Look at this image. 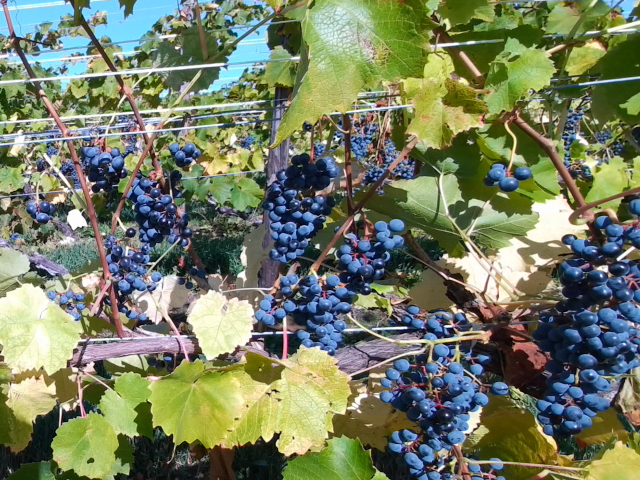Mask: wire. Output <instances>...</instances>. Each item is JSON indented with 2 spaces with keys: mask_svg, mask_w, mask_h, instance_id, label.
<instances>
[{
  "mask_svg": "<svg viewBox=\"0 0 640 480\" xmlns=\"http://www.w3.org/2000/svg\"><path fill=\"white\" fill-rule=\"evenodd\" d=\"M636 32H640V27L612 30V31H609L607 33V36L611 37V36L618 35V34L636 33Z\"/></svg>",
  "mask_w": 640,
  "mask_h": 480,
  "instance_id": "obj_8",
  "label": "wire"
},
{
  "mask_svg": "<svg viewBox=\"0 0 640 480\" xmlns=\"http://www.w3.org/2000/svg\"><path fill=\"white\" fill-rule=\"evenodd\" d=\"M505 38H494V39H481V40H462V41H453V42H441V43H432L430 45L431 49L435 48H443V47H456V46H464V45H483V44H496V43H505Z\"/></svg>",
  "mask_w": 640,
  "mask_h": 480,
  "instance_id": "obj_6",
  "label": "wire"
},
{
  "mask_svg": "<svg viewBox=\"0 0 640 480\" xmlns=\"http://www.w3.org/2000/svg\"><path fill=\"white\" fill-rule=\"evenodd\" d=\"M637 80H640V75L623 76L618 78H607V79H600V80H588V81L578 82V83L550 85L547 87V90L552 91V90L568 89V88H580V87H587L590 85H603V84L609 85L610 83H620L625 81H637Z\"/></svg>",
  "mask_w": 640,
  "mask_h": 480,
  "instance_id": "obj_4",
  "label": "wire"
},
{
  "mask_svg": "<svg viewBox=\"0 0 640 480\" xmlns=\"http://www.w3.org/2000/svg\"><path fill=\"white\" fill-rule=\"evenodd\" d=\"M197 334L185 335H124V336H105V337H89L78 338V343L91 342H107V341H126V340H188L197 339Z\"/></svg>",
  "mask_w": 640,
  "mask_h": 480,
  "instance_id": "obj_3",
  "label": "wire"
},
{
  "mask_svg": "<svg viewBox=\"0 0 640 480\" xmlns=\"http://www.w3.org/2000/svg\"><path fill=\"white\" fill-rule=\"evenodd\" d=\"M415 107H416L415 103H407V104L394 105V106H373V107H367V108L348 109L347 113L358 114V113H370L375 111H396V110H403V109H409V108H415Z\"/></svg>",
  "mask_w": 640,
  "mask_h": 480,
  "instance_id": "obj_7",
  "label": "wire"
},
{
  "mask_svg": "<svg viewBox=\"0 0 640 480\" xmlns=\"http://www.w3.org/2000/svg\"><path fill=\"white\" fill-rule=\"evenodd\" d=\"M303 56L296 57H281L272 61H217L210 63H196V64H174L168 66H152L145 68L127 69L123 71L113 72H101L94 74H82L66 77H51V78H37V79H23V80H0L1 86H13V85H25V84H39V83H53V82H68L84 79H96L104 77L126 76L129 74L147 73L154 71H170L176 69H224L232 66H274L283 62H299L303 61Z\"/></svg>",
  "mask_w": 640,
  "mask_h": 480,
  "instance_id": "obj_1",
  "label": "wire"
},
{
  "mask_svg": "<svg viewBox=\"0 0 640 480\" xmlns=\"http://www.w3.org/2000/svg\"><path fill=\"white\" fill-rule=\"evenodd\" d=\"M285 120H286L285 116H280V117H270V118H255V119L240 120L235 122H219V123H213L208 125H198L194 127H163L161 129H129L125 131L106 133V134H85L80 136L48 138L44 140L7 141V142L0 143V148L9 147V146H22V145H46L50 143L82 141L87 139H108V138L127 136L131 134L171 135L177 132H196L200 130L216 129L219 127H237V126L251 125V124H257V123L282 122Z\"/></svg>",
  "mask_w": 640,
  "mask_h": 480,
  "instance_id": "obj_2",
  "label": "wire"
},
{
  "mask_svg": "<svg viewBox=\"0 0 640 480\" xmlns=\"http://www.w3.org/2000/svg\"><path fill=\"white\" fill-rule=\"evenodd\" d=\"M541 320H510V321H497V322H488V323H475V324H464V323H454L448 324V329H477V328H490V327H499V326H512V325H541Z\"/></svg>",
  "mask_w": 640,
  "mask_h": 480,
  "instance_id": "obj_5",
  "label": "wire"
}]
</instances>
